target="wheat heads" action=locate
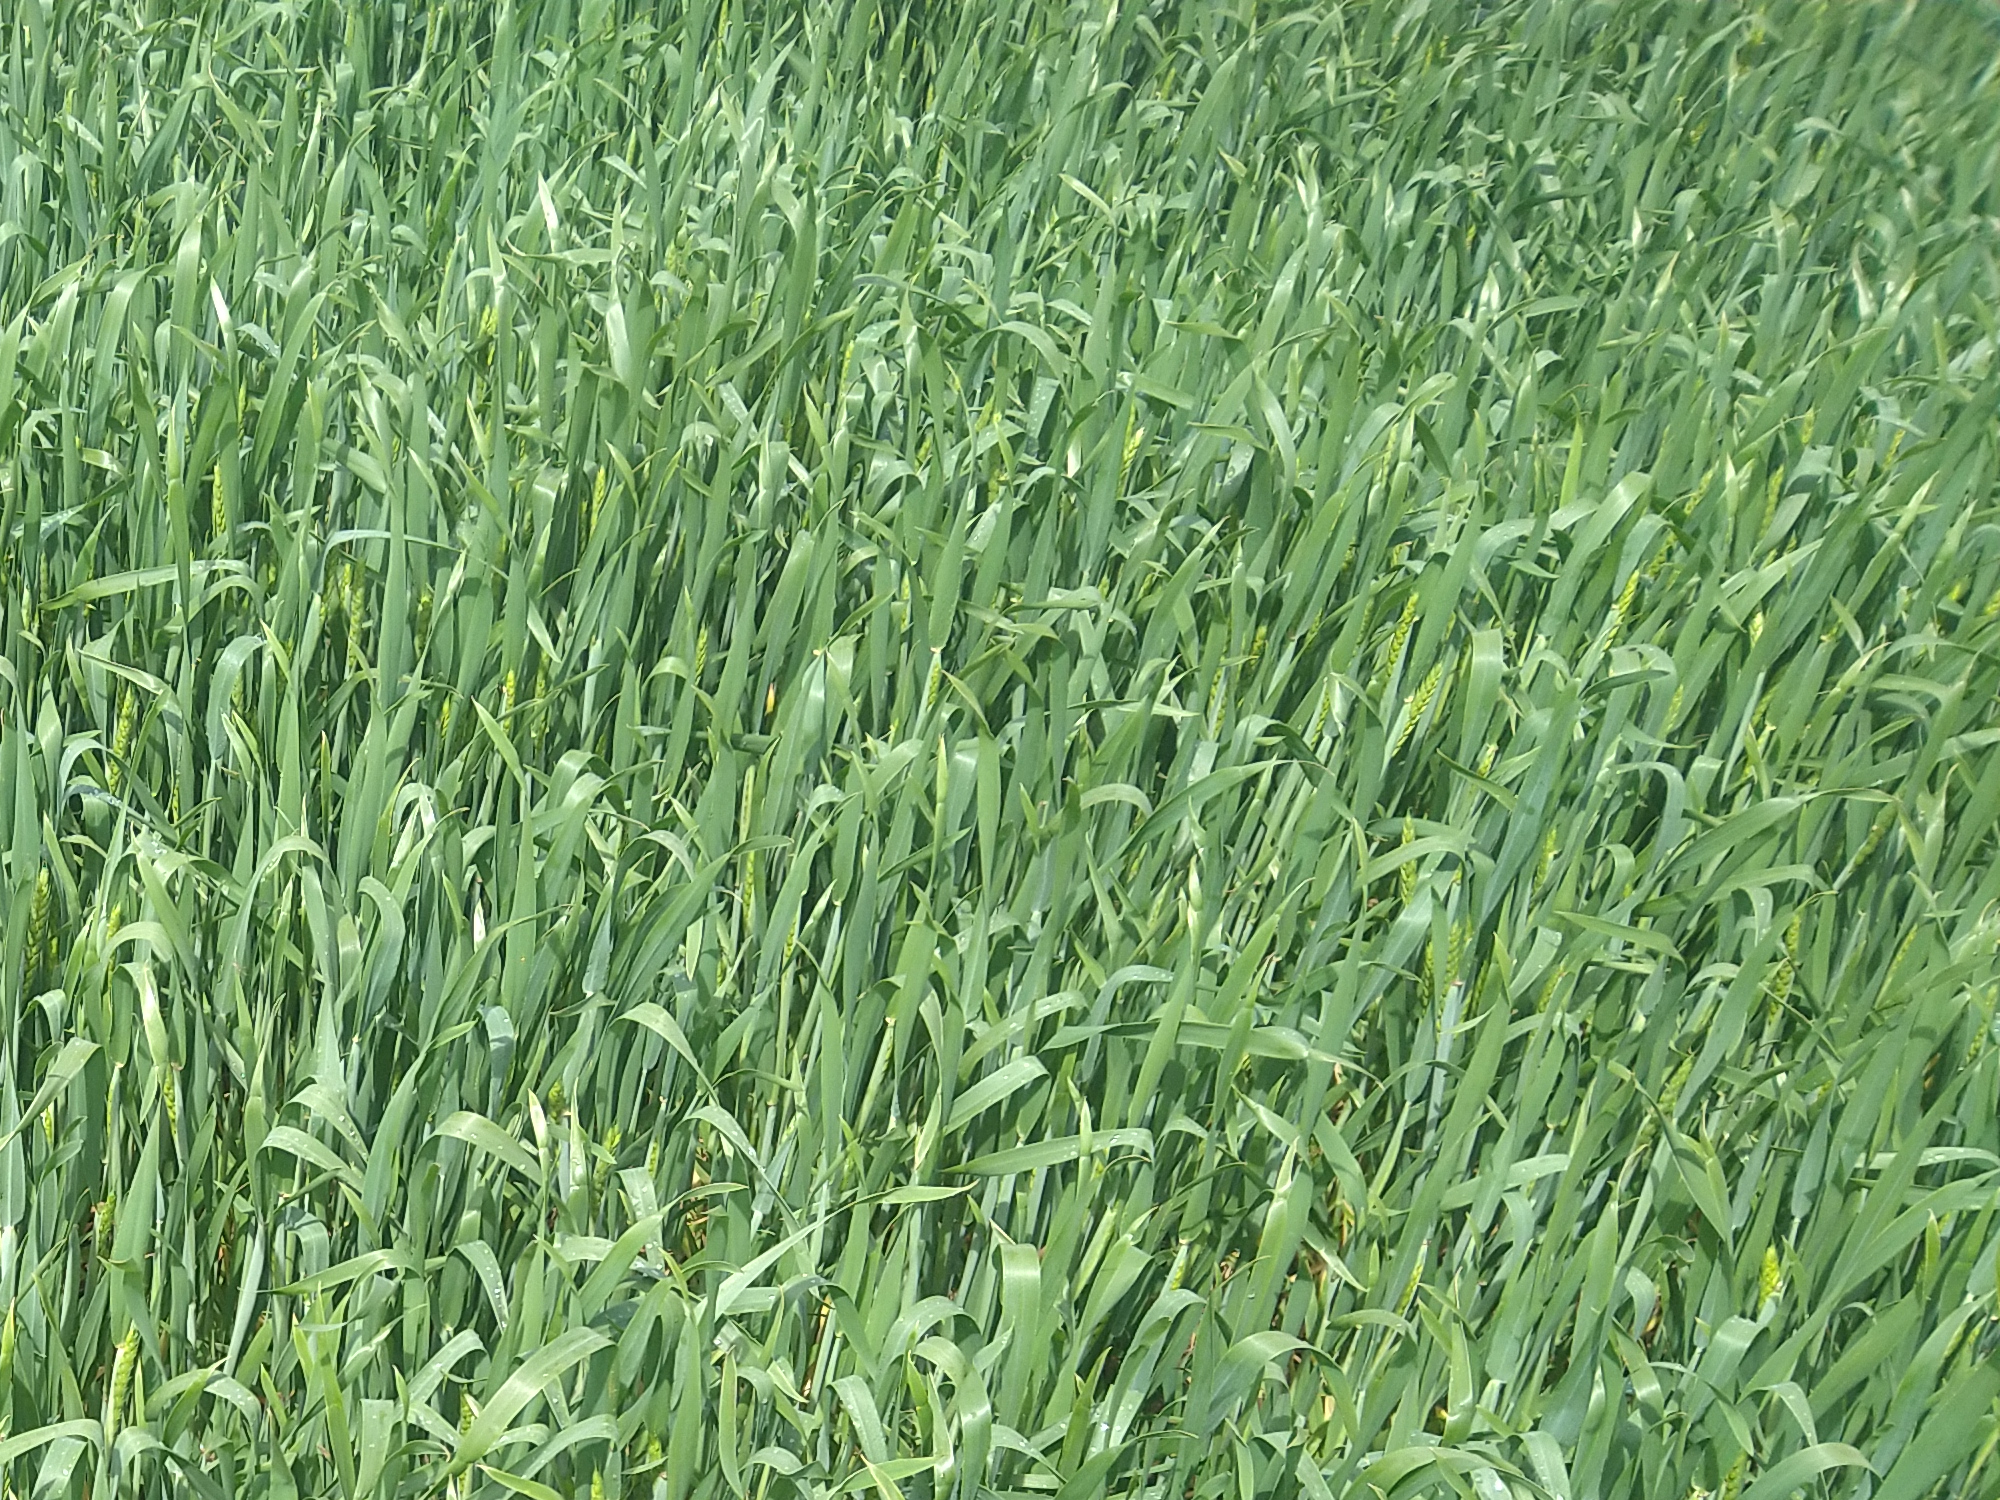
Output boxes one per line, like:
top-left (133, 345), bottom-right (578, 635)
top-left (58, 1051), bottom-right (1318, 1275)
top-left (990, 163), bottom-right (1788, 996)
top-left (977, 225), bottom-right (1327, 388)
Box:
top-left (914, 431), bottom-right (939, 473)
top-left (273, 1249), bottom-right (277, 1296)
top-left (1425, 46), bottom-right (1432, 76)
top-left (1628, 1053), bottom-right (1693, 1165)
top-left (337, 565), bottom-right (361, 618)
top-left (325, 492), bottom-right (332, 539)
top-left (1943, 574), bottom-right (1970, 599)
top-left (428, 1063), bottom-right (449, 1122)
top-left (520, 506), bottom-right (534, 545)
top-left (161, 1066), bottom-right (174, 1123)
top-left (1885, 420), bottom-right (1910, 467)
top-left (458, 1376), bottom-right (485, 1496)
top-left (1653, 423), bottom-right (1670, 477)
top-left (1333, 156), bottom-right (1351, 212)
top-left (1568, 292), bottom-right (1588, 342)
top-left (1914, 789), bottom-right (1934, 837)
top-left (18, 868), bottom-right (50, 1003)
top-left (1214, 1246), bottom-right (1238, 1280)
top-left (1171, 1246), bottom-right (1191, 1294)
top-left (1785, 530), bottom-right (1797, 556)
top-left (500, 593), bottom-right (507, 620)
top-left (1819, 137), bottom-right (1830, 167)
top-left (41, 552), bottom-right (54, 642)
top-left (234, 380), bottom-right (247, 442)
top-left (1800, 1078), bottom-right (1831, 1119)
top-left (1147, 880), bottom-right (1169, 942)
top-left (634, 1473), bottom-right (652, 1500)
top-left (1599, 568), bottom-right (1641, 660)
top-left (1475, 744), bottom-right (1494, 777)
top-left (110, 682), bottom-right (141, 794)
top-left (415, 597), bottom-right (432, 653)
top-left (1312, 1138), bottom-right (1325, 1184)
top-left (1123, 409), bottom-right (1137, 459)
top-left (1466, 225), bottom-right (1477, 251)
top-left (1350, 590), bottom-right (1376, 665)
top-left (695, 627), bottom-right (708, 676)
top-left (1399, 812), bottom-right (1416, 906)
top-left (1160, 67), bottom-right (1176, 108)
top-left (97, 1202), bottom-right (109, 1258)
top-left (1760, 545), bottom-right (1782, 568)
top-left (475, 311), bottom-right (499, 401)
top-left (408, 0), bottom-right (418, 42)
top-left (1725, 1447), bottom-right (1748, 1500)
top-left (1533, 956), bottom-right (1569, 1044)
top-left (1673, 462), bottom-right (1720, 546)
top-left (1336, 546), bottom-right (1358, 583)
top-left (592, 1127), bottom-right (623, 1185)
top-left (1439, 35), bottom-right (1448, 59)
top-left (1091, 577), bottom-right (1109, 614)
top-left (1308, 685), bottom-right (1329, 751)
top-left (498, 670), bottom-right (519, 748)
top-left (30, 613), bottom-right (39, 676)
top-left (0, 1432), bottom-right (9, 1500)
top-left (229, 662), bottom-right (244, 712)
top-left (443, 689), bottom-right (451, 732)
top-left (1305, 608), bottom-right (1324, 651)
top-left (743, 360), bottom-right (758, 406)
top-left (217, 1236), bottom-right (226, 1289)
top-left (593, 466), bottom-right (606, 537)
top-left (692, 1138), bottom-right (708, 1163)
top-left (423, 8), bottom-right (436, 62)
top-left (528, 654), bottom-right (549, 738)
top-left (324, 572), bottom-right (342, 623)
top-left (836, 339), bottom-right (857, 419)
top-left (1955, 977), bottom-right (1998, 1075)
top-left (548, 1072), bottom-right (564, 1174)
top-left (290, 395), bottom-right (312, 441)
top-left (1873, 925), bottom-right (1917, 1006)
top-left (1639, 529), bottom-right (1675, 590)
top-left (716, 959), bottom-right (723, 993)
top-left (1135, 574), bottom-right (1153, 614)
top-left (1437, 919), bottom-right (1461, 1025)
top-left (1751, 682), bottom-right (1784, 730)
top-left (114, 670), bottom-right (127, 731)
top-left (1532, 828), bottom-right (1557, 903)
top-left (1608, 444), bottom-right (1618, 472)
top-left (1391, 15), bottom-right (1407, 53)
top-left (1748, 604), bottom-right (1762, 652)
top-left (1471, 960), bottom-right (1489, 1016)
top-left (1421, 937), bottom-right (1430, 1006)
top-left (1757, 1245), bottom-right (1782, 1321)
top-left (647, 1440), bottom-right (659, 1468)
top-left (647, 1134), bottom-right (657, 1179)
top-left (105, 1320), bottom-right (138, 1437)
top-left (90, 167), bottom-right (97, 200)
top-left (1793, 206), bottom-right (1818, 267)
top-left (1383, 189), bottom-right (1395, 230)
top-left (105, 906), bottom-right (121, 964)
top-left (763, 339), bottom-right (781, 412)
top-left (108, 1070), bottom-right (120, 1129)
top-left (312, 323), bottom-right (318, 357)
top-left (1392, 664), bottom-right (1444, 755)
top-left (1385, 592), bottom-right (1419, 683)
top-left (631, 242), bottom-right (643, 274)
top-left (389, 435), bottom-right (401, 473)
top-left (1385, 1233), bottom-right (1430, 1344)
top-left (1742, 726), bottom-right (1766, 778)
top-left (1221, 618), bottom-right (1230, 664)
top-left (590, 1466), bottom-right (609, 1500)
top-left (211, 459), bottom-right (228, 559)
top-left (1990, 1004), bottom-right (2000, 1038)
top-left (266, 539), bottom-right (278, 580)
top-left (1756, 466), bottom-right (1785, 544)
top-left (1982, 587), bottom-right (2000, 617)
top-left (1657, 682), bottom-right (1683, 749)
top-left (1209, 661), bottom-right (1225, 744)
top-left (1444, 608), bottom-right (1455, 645)
top-left (1463, 958), bottom-right (1479, 1014)
top-left (779, 902), bottom-right (800, 956)
top-left (349, 586), bottom-right (362, 678)
top-left (1459, 933), bottom-right (1474, 954)
top-left (1800, 408), bottom-right (1813, 444)
top-left (742, 764), bottom-right (755, 830)
top-left (185, 421), bottom-right (191, 460)
top-left (1763, 917), bottom-right (1800, 1031)
top-left (936, 141), bottom-right (951, 202)
top-left (108, 1187), bottom-right (117, 1240)
top-left (67, 91), bottom-right (83, 123)
top-left (1528, 253), bottom-right (1547, 283)
top-left (1376, 420), bottom-right (1402, 481)
top-left (922, 649), bottom-right (943, 720)
top-left (989, 441), bottom-right (1003, 503)
top-left (1118, 429), bottom-right (1145, 496)
top-left (1849, 797), bottom-right (1892, 874)
top-left (1682, 131), bottom-right (1702, 162)
top-left (740, 848), bottom-right (756, 914)
top-left (172, 745), bottom-right (181, 813)
top-left (1241, 626), bottom-right (1268, 698)
top-left (1457, 635), bottom-right (1472, 676)
top-left (1698, 395), bottom-right (1715, 442)
top-left (22, 574), bottom-right (30, 628)
top-left (858, 1027), bottom-right (897, 1125)
top-left (42, 1099), bottom-right (53, 1148)
top-left (580, 500), bottom-right (587, 552)
top-left (715, 0), bottom-right (727, 66)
